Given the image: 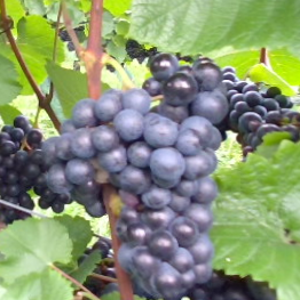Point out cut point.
Instances as JSON below:
<instances>
[{"instance_id":"cut-point-1","label":"cut point","mask_w":300,"mask_h":300,"mask_svg":"<svg viewBox=\"0 0 300 300\" xmlns=\"http://www.w3.org/2000/svg\"><path fill=\"white\" fill-rule=\"evenodd\" d=\"M103 61L110 63L119 73L121 80L129 87V88H133L134 87V83L133 81L130 79V77L125 73L124 69L122 68V66L115 60L112 58V56H110L107 53H103Z\"/></svg>"}]
</instances>
